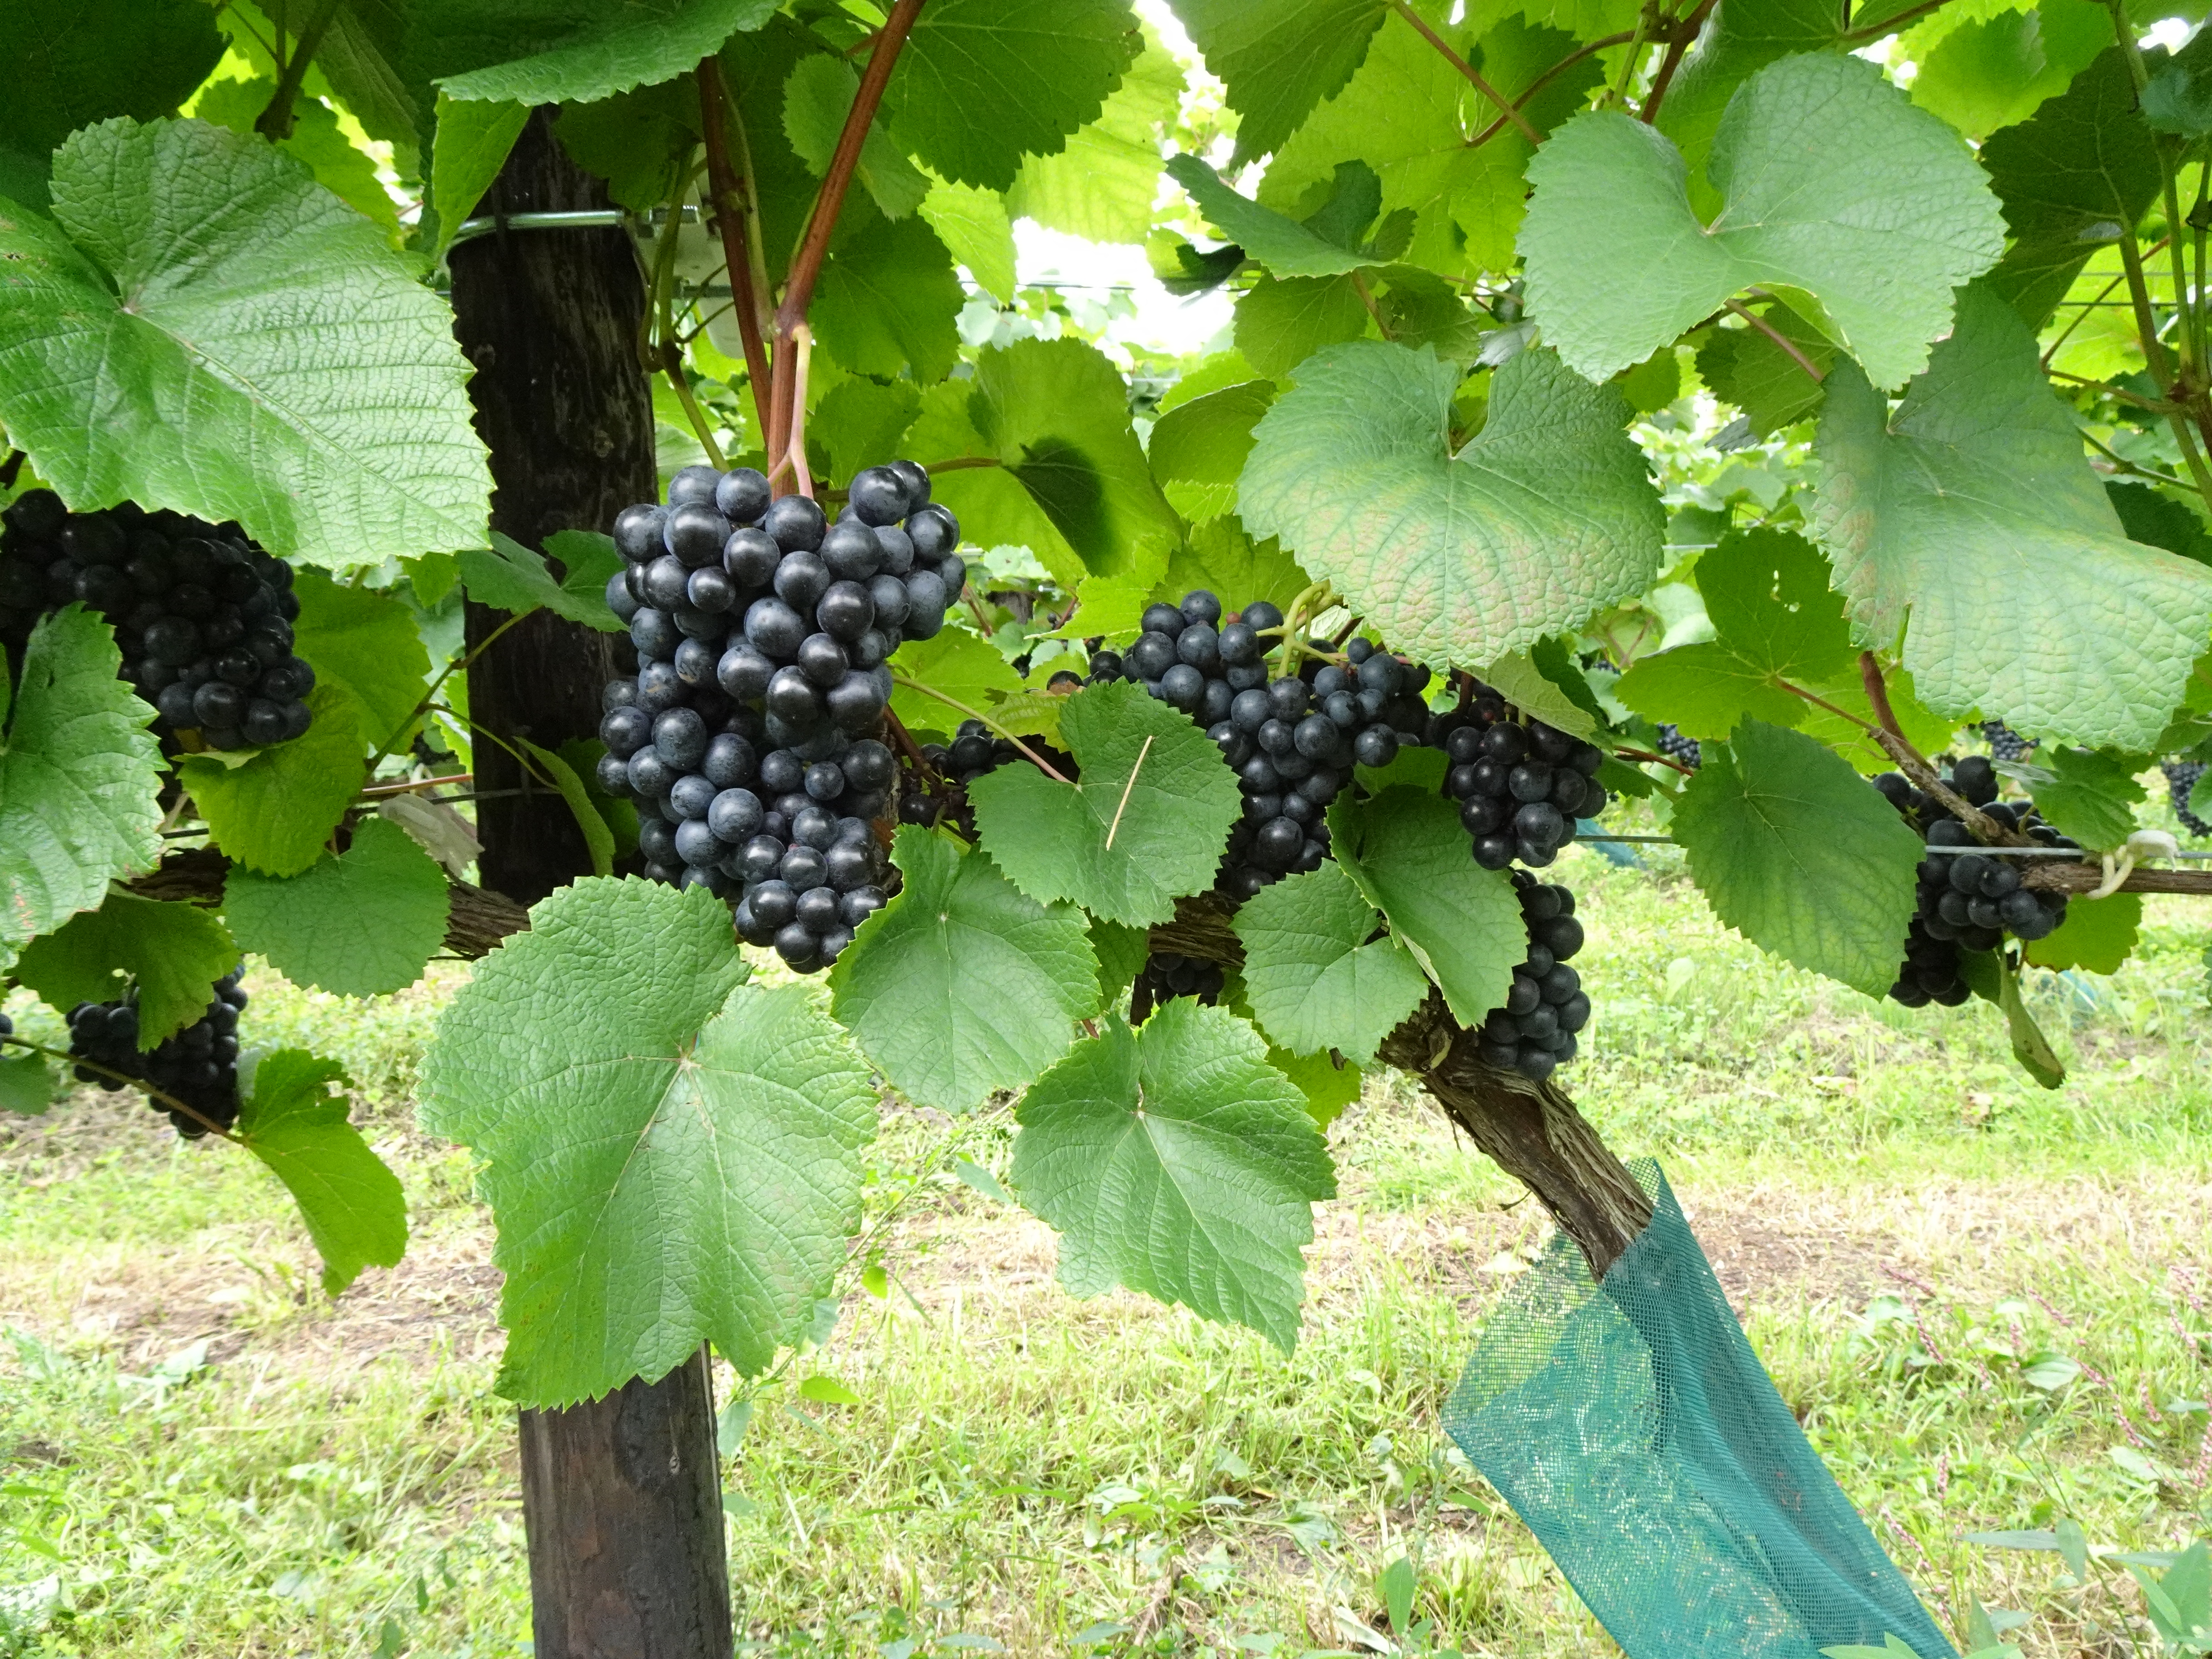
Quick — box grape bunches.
[1871,755,1997,1006]
[719,719,896,975]
[0,490,316,751]
[1048,591,1285,731]
[1431,667,1609,870]
[66,997,145,1092]
[1204,676,1356,903]
[130,961,247,1139]
[605,459,964,761]
[1911,800,2079,950]
[1314,638,1438,768]
[595,653,782,912]
[0,1011,11,1051]
[1150,950,1226,1007]
[1477,866,1589,1080]
[897,720,1030,842]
